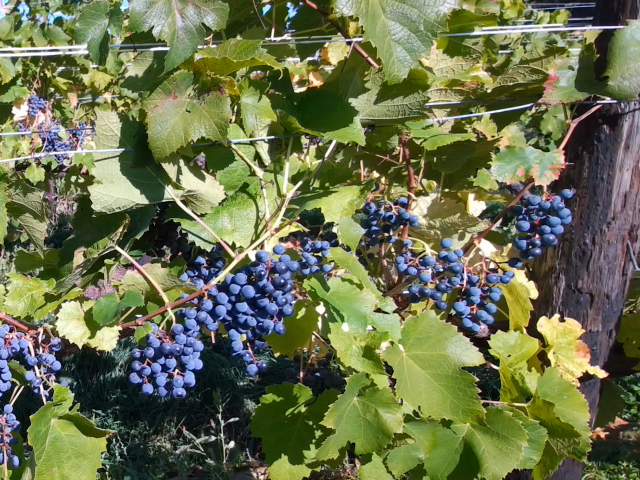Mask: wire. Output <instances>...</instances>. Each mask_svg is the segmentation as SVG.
Wrapping results in <instances>:
<instances>
[{
    "mask_svg": "<svg viewBox=\"0 0 640 480\" xmlns=\"http://www.w3.org/2000/svg\"><path fill=\"white\" fill-rule=\"evenodd\" d=\"M134 147H117V148H109V149H74V150H64V151H47L41 153H32L25 154L23 156L11 157L0 159V164L13 163L25 161L27 159L34 158H43L50 156H66V155H76V154H111V153H119V152H134Z\"/></svg>",
    "mask_w": 640,
    "mask_h": 480,
    "instance_id": "4",
    "label": "wire"
},
{
    "mask_svg": "<svg viewBox=\"0 0 640 480\" xmlns=\"http://www.w3.org/2000/svg\"><path fill=\"white\" fill-rule=\"evenodd\" d=\"M363 33H347L325 34L318 36H289V35H269L265 37L266 41L271 40H287L259 43L260 48L278 47V46H299V45H341L353 44L363 41Z\"/></svg>",
    "mask_w": 640,
    "mask_h": 480,
    "instance_id": "2",
    "label": "wire"
},
{
    "mask_svg": "<svg viewBox=\"0 0 640 480\" xmlns=\"http://www.w3.org/2000/svg\"><path fill=\"white\" fill-rule=\"evenodd\" d=\"M87 44H65V45H57V46H48V47H27V46H0V51H8L1 52L0 58L4 57H20V58H39V57H63V56H87L89 54L88 50H78V51H61V52H50V51H60V50H68V49H87Z\"/></svg>",
    "mask_w": 640,
    "mask_h": 480,
    "instance_id": "3",
    "label": "wire"
},
{
    "mask_svg": "<svg viewBox=\"0 0 640 480\" xmlns=\"http://www.w3.org/2000/svg\"><path fill=\"white\" fill-rule=\"evenodd\" d=\"M535 106H536V102L532 101V102H527V103H523V104H517L515 106H510V107H507V108L491 110V111H477V112H473V113H467V114H463V115H459V116H452V117L429 118L428 122L429 123L455 122V121H461V120H465V119H469V118H475V117H479V116H494V115H499V114H508V113H510L512 111H517L519 109H525V108L535 107Z\"/></svg>",
    "mask_w": 640,
    "mask_h": 480,
    "instance_id": "5",
    "label": "wire"
},
{
    "mask_svg": "<svg viewBox=\"0 0 640 480\" xmlns=\"http://www.w3.org/2000/svg\"><path fill=\"white\" fill-rule=\"evenodd\" d=\"M623 25H597L596 21L543 24H483L468 31H439V36L514 35L538 32H575L589 30H623Z\"/></svg>",
    "mask_w": 640,
    "mask_h": 480,
    "instance_id": "1",
    "label": "wire"
},
{
    "mask_svg": "<svg viewBox=\"0 0 640 480\" xmlns=\"http://www.w3.org/2000/svg\"><path fill=\"white\" fill-rule=\"evenodd\" d=\"M286 134L267 136V137H248V138H230V143H250V142H269L286 139Z\"/></svg>",
    "mask_w": 640,
    "mask_h": 480,
    "instance_id": "6",
    "label": "wire"
}]
</instances>
